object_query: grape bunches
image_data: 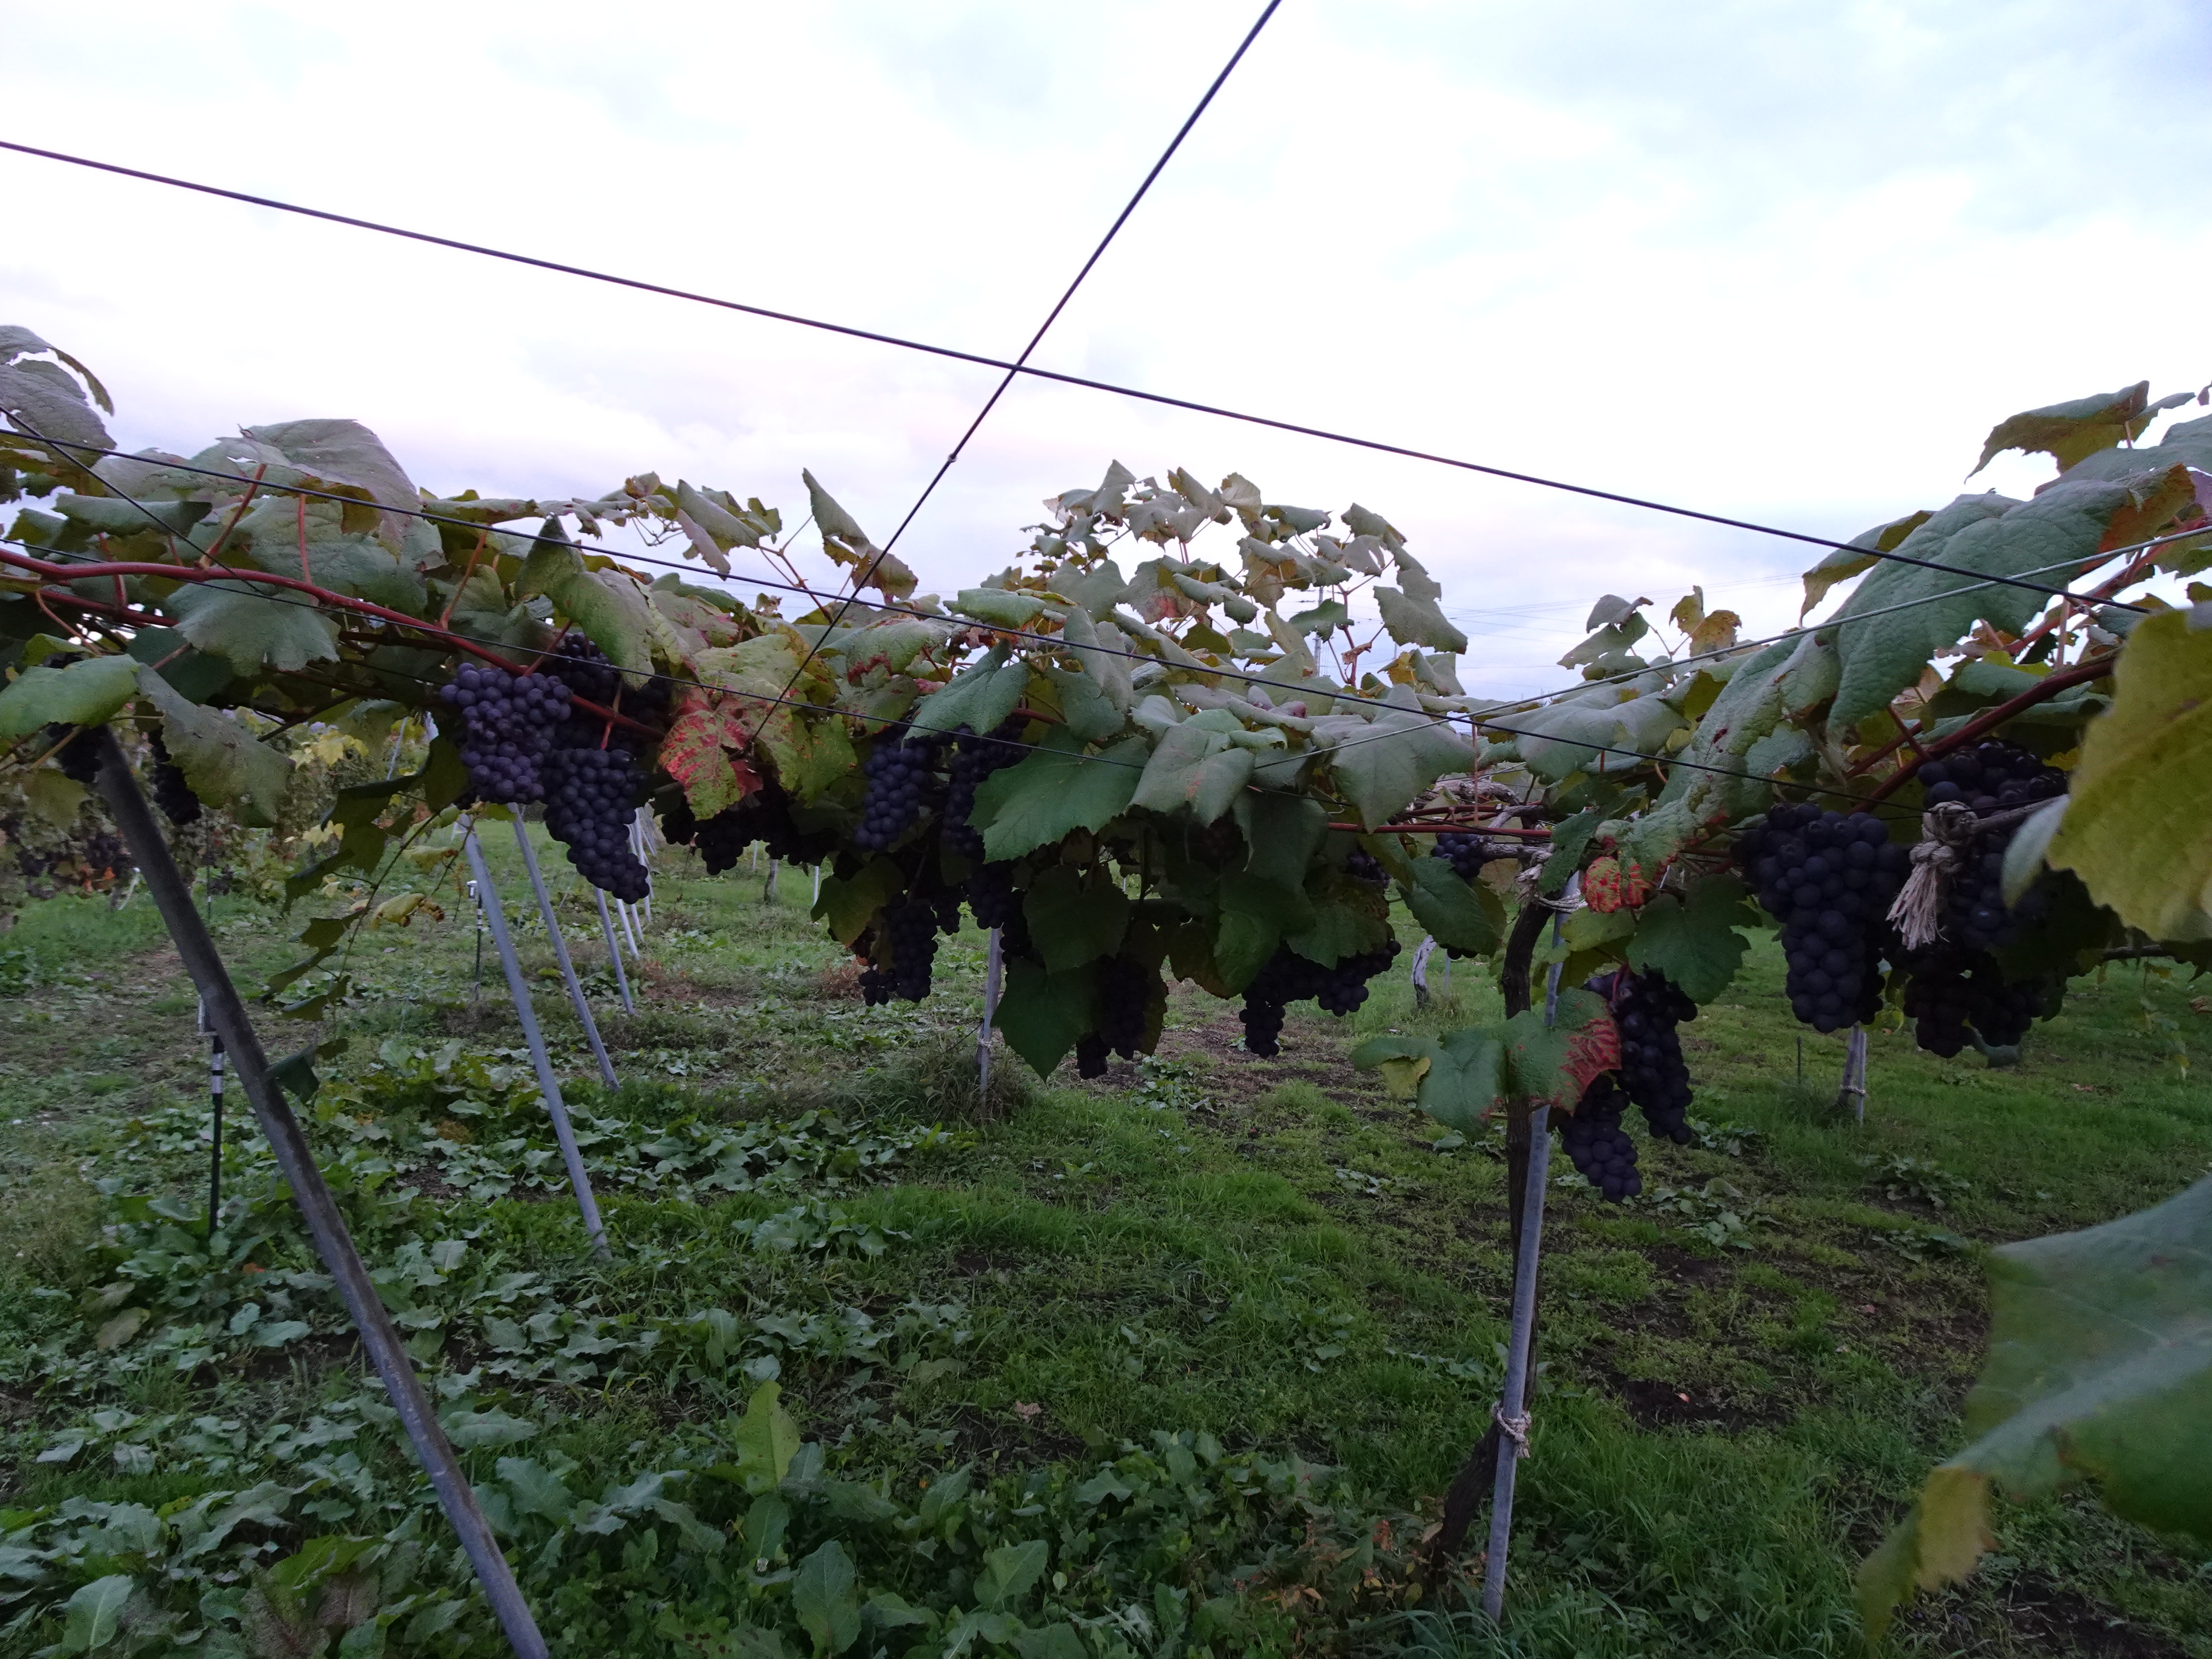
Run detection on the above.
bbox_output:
[1967,942,2047,1050]
[966,859,1016,933]
[1340,838,1396,889]
[1584,968,1700,1141]
[559,630,618,699]
[442,662,570,806]
[1318,916,1407,1023]
[694,825,756,879]
[1173,801,1242,867]
[1556,1071,1647,1204]
[849,885,944,1006]
[1738,802,1900,1036]
[1917,737,2071,821]
[940,720,1039,863]
[1234,949,1317,1062]
[851,744,939,864]
[1430,829,1490,878]
[1952,828,2005,934]
[1884,937,1972,1063]
[1437,932,1483,963]
[141,720,213,829]
[79,827,126,870]
[543,733,655,905]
